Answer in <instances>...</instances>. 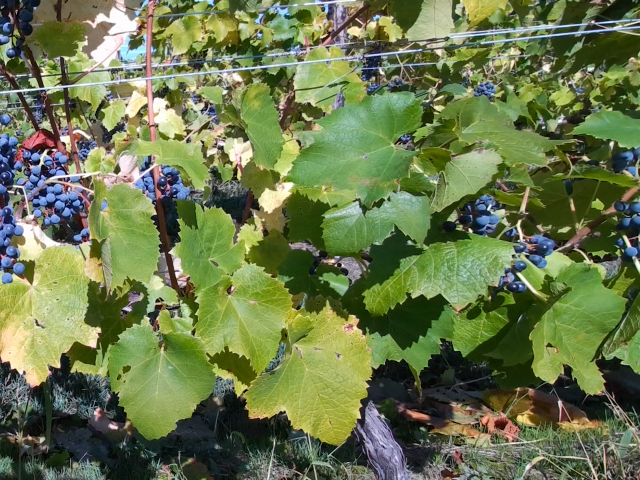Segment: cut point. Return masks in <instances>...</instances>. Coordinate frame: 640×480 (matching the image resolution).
<instances>
[{"label":"cut point","mask_w":640,"mask_h":480,"mask_svg":"<svg viewBox=\"0 0 640 480\" xmlns=\"http://www.w3.org/2000/svg\"><path fill=\"white\" fill-rule=\"evenodd\" d=\"M523 219H526V217L525 216H521L518 219H516L517 233L519 235L523 234V230L521 228V222H522Z\"/></svg>","instance_id":"1"}]
</instances>
